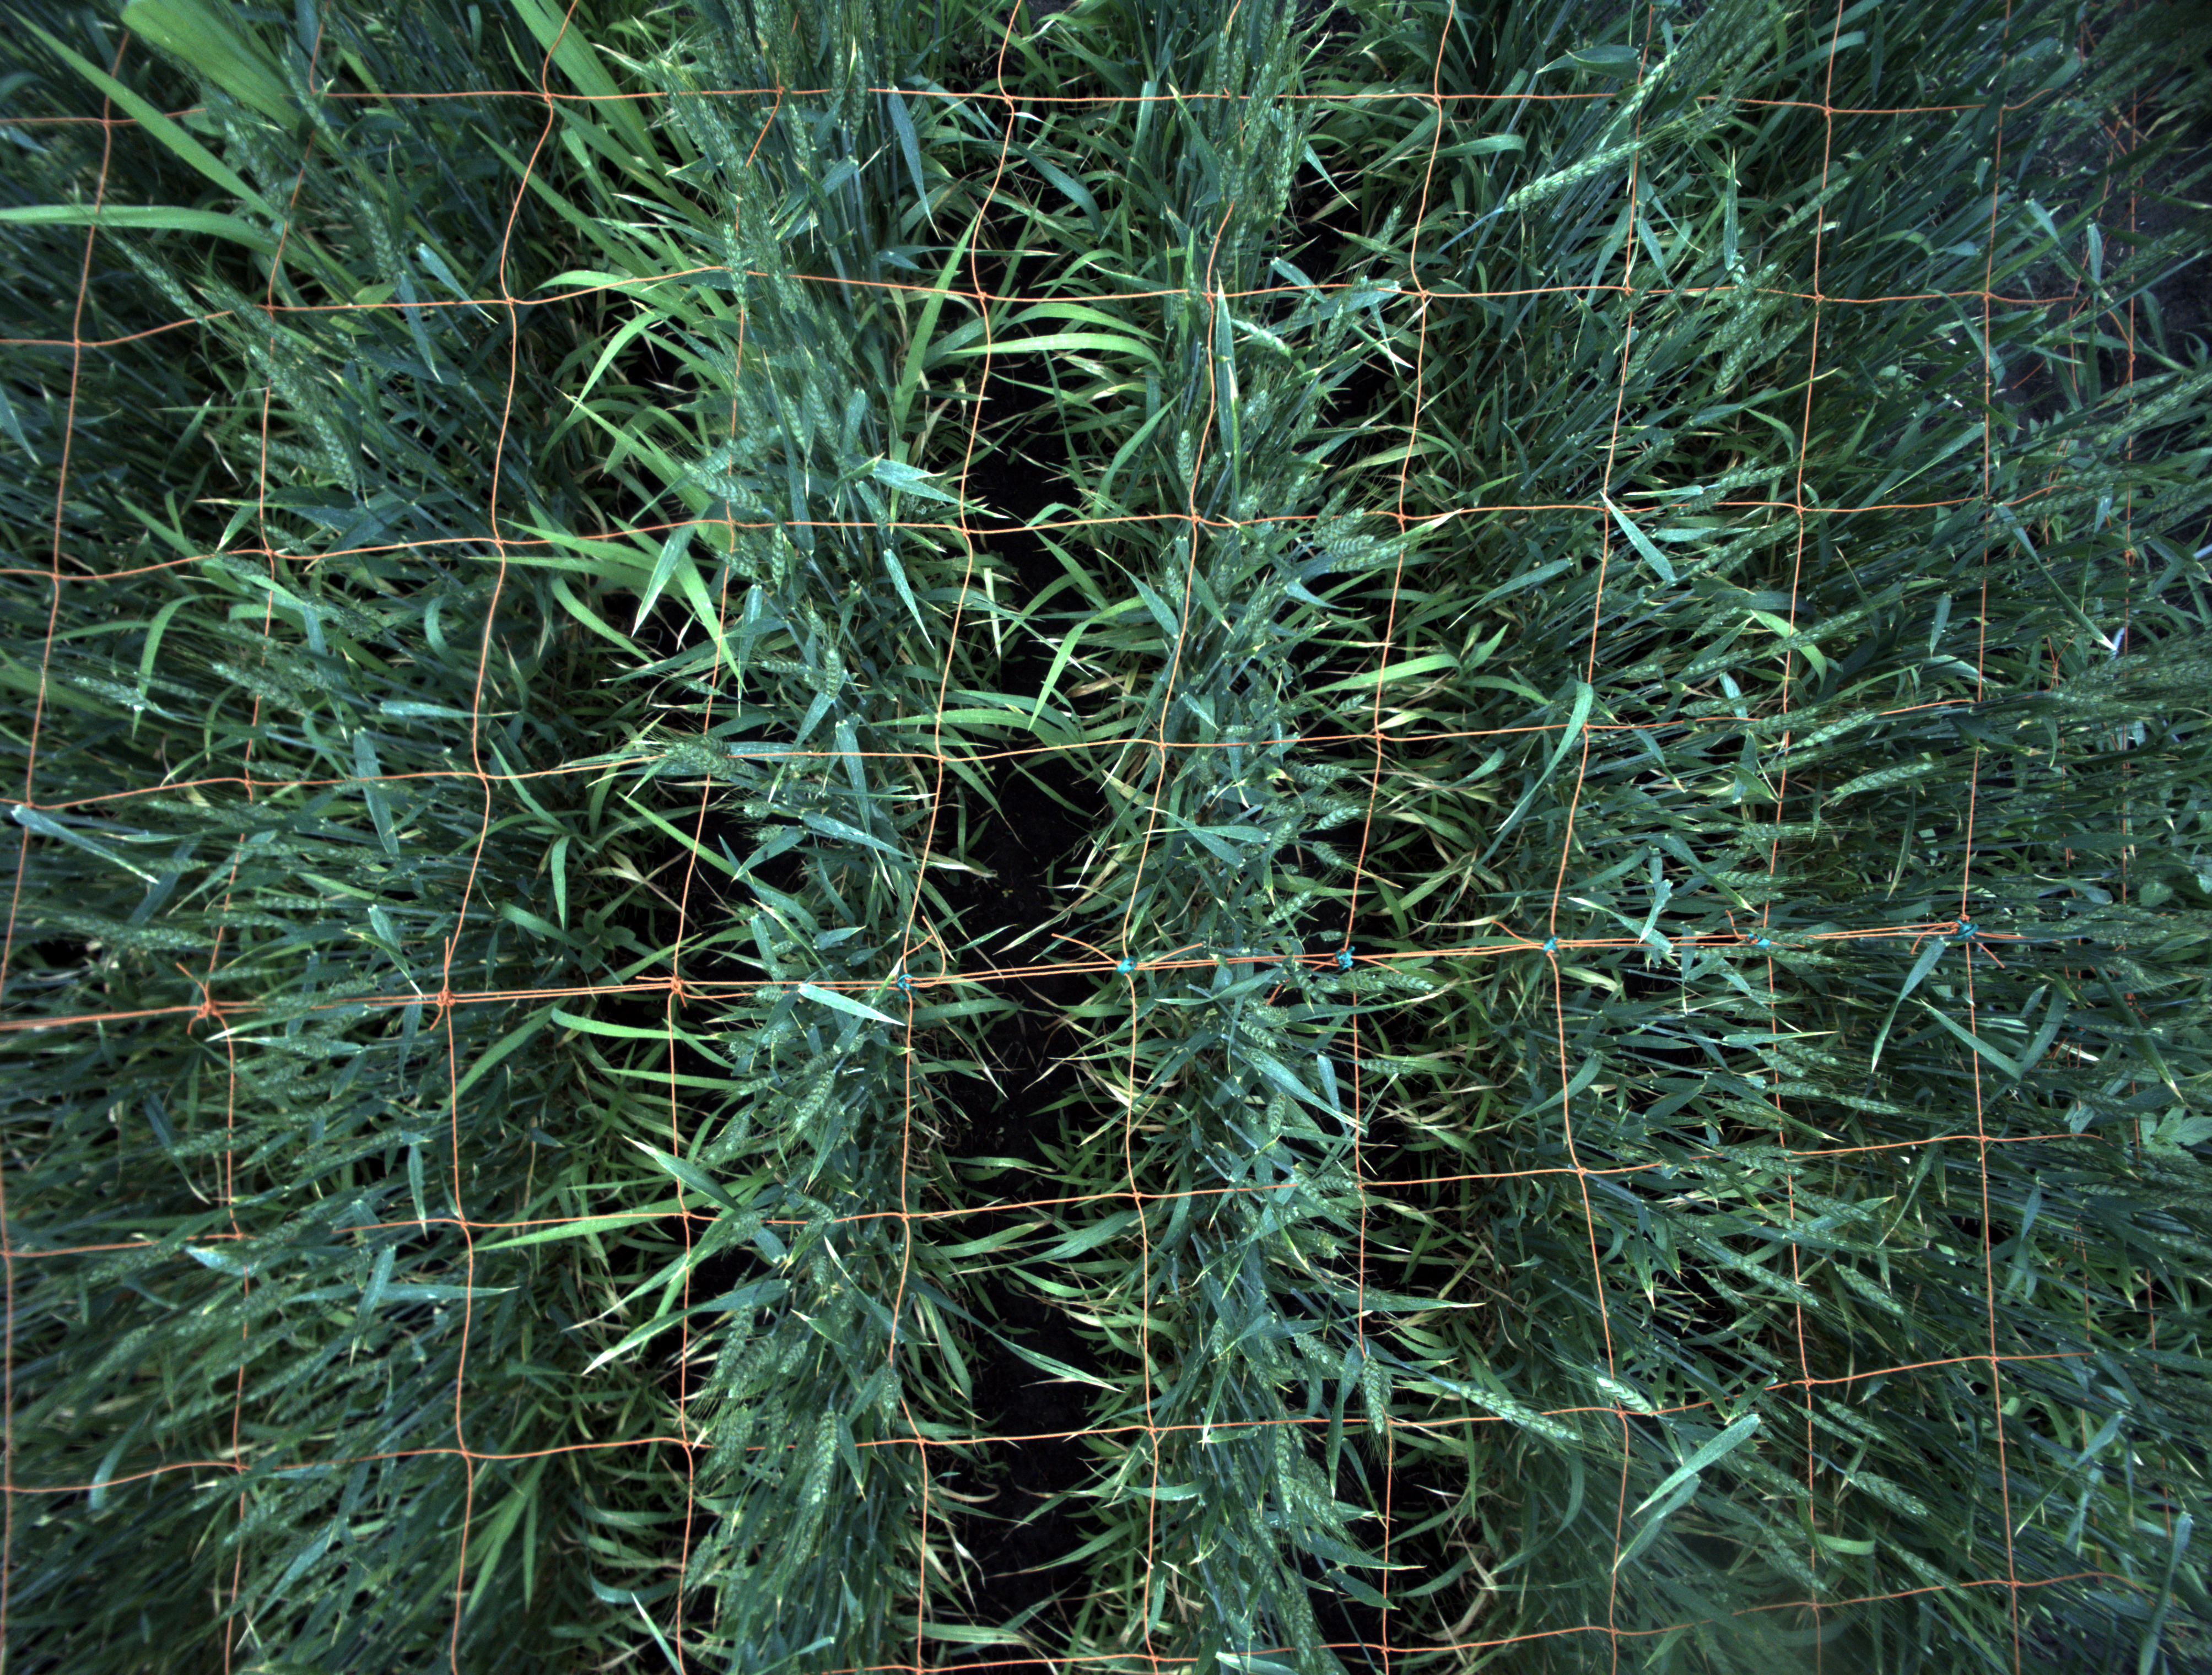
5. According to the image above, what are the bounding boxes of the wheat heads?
[916,504,928,515]
[1704,945,1763,959]
[1959,564,1995,577]
[203,912,283,935]
[1459,1382,1583,1444]
[247,1349,324,1400]
[1727,1249,1819,1305]
[1687,527,1760,575]
[1789,1401,1866,1445]
[1245,1356,1269,1390]
[317,1151,361,1167]
[828,52,845,106]
[837,1129,851,1150]
[240,760,298,779]
[1255,389,1271,415]
[1714,261,1780,313]
[1163,563,1187,600]
[252,662,320,691]
[1226,100,1241,141]
[1745,293,1782,331]
[2060,728,2121,748]
[1548,700,1569,715]
[2131,1185,2211,1221]
[1707,1094,1765,1116]
[1265,889,1312,926]
[2050,904,2120,933]
[798,2,821,67]
[837,1289,856,1314]
[142,675,199,699]
[1359,1057,1410,1076]
[1287,293,1314,328]
[750,528,774,563]
[759,1029,793,1045]
[2091,1102,2139,1119]
[290,1143,343,1166]
[2128,1370,2178,1406]
[2055,468,2145,487]
[2073,1087,2126,1107]
[1314,976,1341,995]
[389,1335,419,1355]
[290,574,325,607]
[776,1340,807,1374]
[791,281,820,321]
[238,1052,286,1073]
[1689,607,1740,639]
[2092,565,2134,582]
[1213,28,1229,94]
[1337,969,1385,994]
[63,912,141,950]
[1754,319,1809,368]
[2153,629,2211,663]
[823,649,842,696]
[1291,1166,1333,1211]
[319,6,358,56]
[1207,99,1221,142]
[287,361,345,413]
[1262,821,1293,855]
[809,1412,839,1505]
[2065,977,2093,988]
[1738,890,1786,903]
[1254,1001,1291,1026]
[217,622,291,651]
[2131,1525,2208,1573]
[2175,1394,2212,1421]
[1608,298,1627,316]
[2117,770,2177,789]
[2082,771,2133,785]
[1757,1461,1810,1500]
[1638,1337,1675,1356]
[725,436,755,471]
[718,23,738,71]
[139,33,214,88]
[1243,403,1256,423]
[2030,321,2075,349]
[1983,707,2030,725]
[220,1563,286,1619]
[1261,126,1280,183]
[278,1389,324,1420]
[285,1474,346,1514]
[1831,1092,1901,1117]
[1290,1331,1331,1363]
[1716,547,1753,575]
[2021,771,2058,780]
[1774,1508,1844,1568]
[325,846,385,865]
[1712,1142,1807,1178]
[1694,526,1733,543]
[2002,1104,2052,1128]
[1301,656,1327,676]
[1231,1451,1244,1497]
[274,858,309,869]
[1231,175,1254,219]
[1229,317,1292,354]
[335,779,369,795]
[725,1223,764,1248]
[313,415,358,491]
[335,332,372,363]
[286,1398,335,1435]
[1324,533,1376,557]
[1702,593,1749,615]
[776,1314,800,1353]
[286,1101,342,1125]
[1686,29,1730,93]
[1335,317,1356,346]
[753,823,785,844]
[243,1240,285,1267]
[1269,105,1296,215]
[831,3,842,49]
[2106,782,2161,802]
[1271,1200,1293,1225]
[1759,1519,1829,1594]
[1195,754,1214,787]
[807,609,828,636]
[259,649,298,669]
[793,1423,814,1473]
[200,275,263,328]
[1845,1469,1931,1519]
[1237,1199,1260,1225]
[1310,840,1343,867]
[734,1268,750,1290]
[384,1494,402,1522]
[706,1138,729,1162]
[816,363,836,404]
[253,1626,290,1666]
[1378,202,1402,244]
[336,1357,381,1384]
[207,80,235,103]
[860,1,877,39]
[273,989,331,1010]
[2046,1137,2098,1155]
[1705,847,1746,860]
[1282,1594,1342,1674]
[2196,1434,2211,1453]
[1225,723,1254,739]
[1201,456,1220,481]
[190,1474,243,1512]
[2036,0,2074,24]
[223,114,292,215]
[713,1402,749,1444]
[1329,1203,1351,1215]
[173,1125,235,1157]
[1235,1041,1266,1065]
[1746,1113,1784,1131]
[238,431,332,468]
[687,679,721,698]
[1241,59,1274,123]
[769,1393,786,1448]
[769,962,788,981]
[761,656,804,678]
[2171,965,2211,977]
[1833,763,1936,796]
[1187,672,1205,688]
[242,3,286,25]
[364,1126,400,1149]
[330,609,376,640]
[1671,311,1698,336]
[1251,618,1273,645]
[2097,2,2121,19]
[1714,335,1753,394]
[2100,229,2184,286]
[394,450,423,473]
[1624,757,1659,776]
[1173,342,1183,362]
[827,312,855,365]
[1200,67,1214,99]
[1670,3,1732,82]
[1242,1105,1260,1126]
[1176,428,1194,486]
[1621,49,1679,119]
[2072,1150,2110,1169]
[1677,1210,1715,1228]
[1729,1588,1786,1640]
[1272,1412,1293,1512]
[226,798,285,821]
[2078,68,2153,114]
[1198,295,1212,324]
[2178,37,2211,65]
[1320,928,1342,944]
[298,157,336,199]
[88,1238,187,1283]
[215,550,271,576]
[1281,705,1297,718]
[1744,1144,1794,1161]
[714,1419,754,1471]
[224,1492,284,1545]
[1359,1282,1391,1308]
[1731,833,1767,846]
[1707,964,1738,976]
[1258,685,1269,706]
[866,1323,876,1351]
[827,1548,842,1598]
[2145,26,2204,69]
[765,1096,787,1117]
[1625,1627,1651,1660]
[243,448,294,484]
[1645,645,1672,666]
[2055,654,2151,693]
[1313,1171,1357,1195]
[1741,1337,1784,1368]
[881,1362,901,1412]
[2176,1632,2210,1661]
[1733,1005,1777,1021]
[1239,492,1261,518]
[1221,1581,1239,1620]
[1754,1542,1808,1589]
[873,1124,881,1136]
[173,1317,231,1340]
[758,208,782,261]
[1319,302,1346,358]
[699,733,733,754]
[1740,820,1815,840]
[1245,1505,1279,1553]
[254,897,338,911]
[1240,1019,1279,1049]
[1236,1,1249,33]
[733,380,770,467]
[789,753,812,773]
[808,1252,829,1285]
[1266,1096,1288,1133]
[1696,1162,1728,1180]
[1736,707,1819,737]
[804,1050,838,1077]
[741,218,767,267]
[1540,138,1554,162]
[2115,703,2165,725]
[1289,1475,1349,1536]
[265,1530,313,1570]
[805,671,825,694]
[1613,1142,1645,1161]
[831,451,857,474]
[771,938,793,957]
[333,1419,376,1448]
[769,314,785,347]
[290,666,335,693]
[849,46,866,138]
[797,1068,837,1132]
[1697,1439,1754,1472]
[882,1560,919,1588]
[2128,805,2175,816]
[1698,226,1746,273]
[682,459,764,513]
[722,218,749,316]
[881,0,896,86]
[208,965,264,980]
[1307,795,1339,814]
[1753,926,1815,948]
[1243,595,1270,635]
[1229,35,1245,95]
[2150,1228,2211,1260]
[264,1005,313,1019]
[723,1,762,67]
[136,928,213,951]
[2173,162,2211,193]
[1298,101,1317,132]
[86,1325,150,1382]
[783,392,807,444]
[2187,907,2211,928]
[2010,37,2060,93]
[754,986,785,1003]
[112,858,160,886]
[1335,694,1367,713]
[806,376,840,449]
[878,1230,893,1251]
[1245,1538,1277,1592]
[306,1544,364,1573]
[1258,1332,1279,1365]
[1241,541,1266,568]
[155,1391,238,1429]
[1312,762,1348,781]
[1693,821,1735,834]
[341,907,371,921]
[1999,885,2042,900]
[1254,709,1279,732]
[1291,413,1319,445]
[2136,1166,2211,1192]
[1833,1261,1905,1316]
[2087,1024,2155,1038]
[307,1012,359,1043]
[1503,141,1645,211]
[772,524,786,585]
[2081,3,2156,70]
[1299,1450,1331,1498]
[1184,855,1209,870]
[1279,472,1293,498]
[1244,1177,1270,1192]
[247,216,286,246]
[714,1295,754,1380]
[214,1317,303,1378]
[849,1033,865,1053]
[250,343,314,423]
[847,1107,860,1126]
[1700,413,1729,426]
[1258,0,1278,44]
[1721,37,1772,95]
[683,1533,711,1588]
[1941,971,1967,988]
[1625,329,1660,383]
[1691,6,1714,39]
[662,79,706,157]
[1342,229,1389,253]
[1662,266,1698,308]
[335,1253,373,1277]
[2054,703,2131,722]
[1299,614,1315,636]
[1312,486,1348,530]
[1818,1396,1886,1443]
[1285,1415,1305,1450]
[2051,110,2102,154]
[1378,1373,1392,1406]
[1888,1544,1970,1599]
[1282,758,1329,787]
[352,597,394,619]
[2105,954,2146,981]
[738,760,760,778]
[1300,471,1323,500]
[1311,506,1365,544]
[727,1039,752,1059]
[697,94,757,196]
[737,1075,772,1096]
[793,1527,817,1567]
[1706,9,1788,82]
[359,197,401,289]
[232,1278,301,1328]
[1742,1378,1788,1422]
[777,17,797,86]
[1769,610,1860,656]
[2165,1374,2212,1396]
[742,802,776,821]
[725,1111,751,1154]
[1683,647,1752,678]
[803,1217,824,1234]
[223,284,325,370]
[894,499,905,519]
[1594,1375,1655,1418]
[2057,1065,2106,1082]
[146,798,206,815]
[1791,713,1878,748]
[345,869,384,882]
[734,903,757,922]
[2076,1182,2129,1197]
[281,54,337,145]
[114,237,211,327]
[2099,374,2171,410]
[1280,862,1300,876]
[376,780,416,798]
[2168,1309,2212,1337]
[1627,280,1653,312]
[2040,618,2126,640]
[1758,1048,1805,1076]
[1757,1423,1776,1441]
[2060,1463,2116,1504]
[1245,742,1258,759]
[2154,659,2212,689]
[1723,453,1760,477]
[2163,73,2211,109]
[1751,322,1791,351]
[2016,574,2072,597]
[2153,1015,2204,1029]
[749,162,772,207]
[1284,1050,1318,1069]
[797,1158,815,1178]
[2047,690,2107,706]
[211,662,303,708]
[1624,662,1660,679]
[1761,948,1836,967]
[1186,272,1200,307]
[1264,800,1296,817]
[2089,370,2212,448]
[211,0,249,39]
[2055,422,2115,440]
[2096,1056,2181,1071]
[1222,1252,1231,1287]
[1792,1188,1874,1222]
[1212,220,1248,293]
[2076,2,2089,22]
[1598,590,1623,605]
[1748,987,1783,1004]
[739,186,757,237]
[727,1332,775,1399]
[712,548,753,577]
[1230,164,1247,202]
[1691,1225,1722,1248]
[1263,1231,1290,1252]
[740,40,755,101]
[808,1195,835,1223]
[701,29,737,108]
[1326,540,1407,572]
[1602,570,1636,590]
[803,783,825,797]
[2138,1148,2212,1181]
[1715,868,1791,888]
[905,493,919,511]
[144,858,207,875]
[282,1034,333,1060]
[226,1124,272,1151]
[2012,485,2114,517]
[1975,516,2036,535]
[1214,563,1233,602]
[1967,1451,2000,1469]
[738,533,760,571]
[287,1075,338,1097]
[174,646,198,660]
[260,1056,316,1087]
[1213,1539,1230,1578]
[1296,972,1327,1003]
[824,1097,840,1120]
[2116,141,2170,193]
[1378,969,1433,992]
[2077,41,2154,103]
[1680,699,1720,717]
[676,739,729,781]
[874,507,888,533]
[1705,297,1763,356]
[1765,1079,1824,1100]
[1682,99,1729,137]
[1260,483,1278,514]
[786,100,813,170]
[71,673,154,710]
[838,373,852,401]
[1775,174,1853,236]
[1755,521,1797,550]
[1972,564,2002,583]
[1315,806,1360,830]
[259,760,302,775]
[836,548,848,572]
[1972,913,2000,925]
[1245,93,1274,163]
[765,1530,784,1563]
[1582,1047,1612,1065]
[1671,1229,1708,1261]
[1292,1577,1315,1670]
[754,1,772,49]
[2089,926,2170,946]
[1248,364,1260,399]
[1686,489,1728,512]
[1997,791,2053,807]
[232,1278,282,1315]
[1295,400,1313,427]
[1218,148,1237,193]
[2148,473,2211,515]
[2114,901,2173,926]
[2134,1463,2192,1486]
[1700,1273,1751,1308]
[664,746,741,773]
[200,807,256,832]
[1720,695,1761,715]
[2165,725,2211,749]
[723,1544,746,1616]
[1777,1039,1842,1068]
[1696,1624,1735,1674]
[364,354,386,377]
[2176,791,2208,802]
[1273,638,1293,663]
[1717,465,1787,491]
[1757,751,1819,772]
[1210,1316,1223,1356]
[1768,1211,1849,1246]
[1639,437,1674,461]
[772,269,798,314]
[714,326,738,366]
[264,525,322,561]
[1251,893,1270,906]
[232,842,305,858]
[1258,436,1275,461]
[2137,494,2211,538]
[2102,873,2162,886]
[246,1207,332,1249]
[1234,844,1259,859]
[1282,1351,1311,1383]
[1287,475,1307,501]
[1281,1,1301,41]
[329,980,377,1000]
[1168,294,1187,326]
[1771,719,1817,736]
[1361,1351,1385,1434]
[732,1205,769,1230]
[2150,560,2206,576]
[1311,1228,1336,1252]
[281,1565,336,1616]
[1729,3,1764,47]
[713,1509,735,1555]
